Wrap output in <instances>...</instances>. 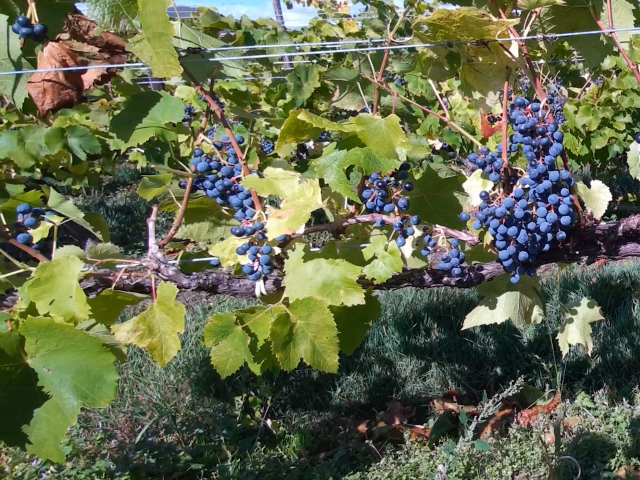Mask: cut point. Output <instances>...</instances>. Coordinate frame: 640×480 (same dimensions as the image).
<instances>
[{"label":"cut point","mask_w":640,"mask_h":480,"mask_svg":"<svg viewBox=\"0 0 640 480\" xmlns=\"http://www.w3.org/2000/svg\"><path fill=\"white\" fill-rule=\"evenodd\" d=\"M258 214H260L262 216V221H265V214H264L263 210L262 211L257 210L255 212V215L252 217V221L256 222V218H257Z\"/></svg>","instance_id":"6a23745f"}]
</instances>
